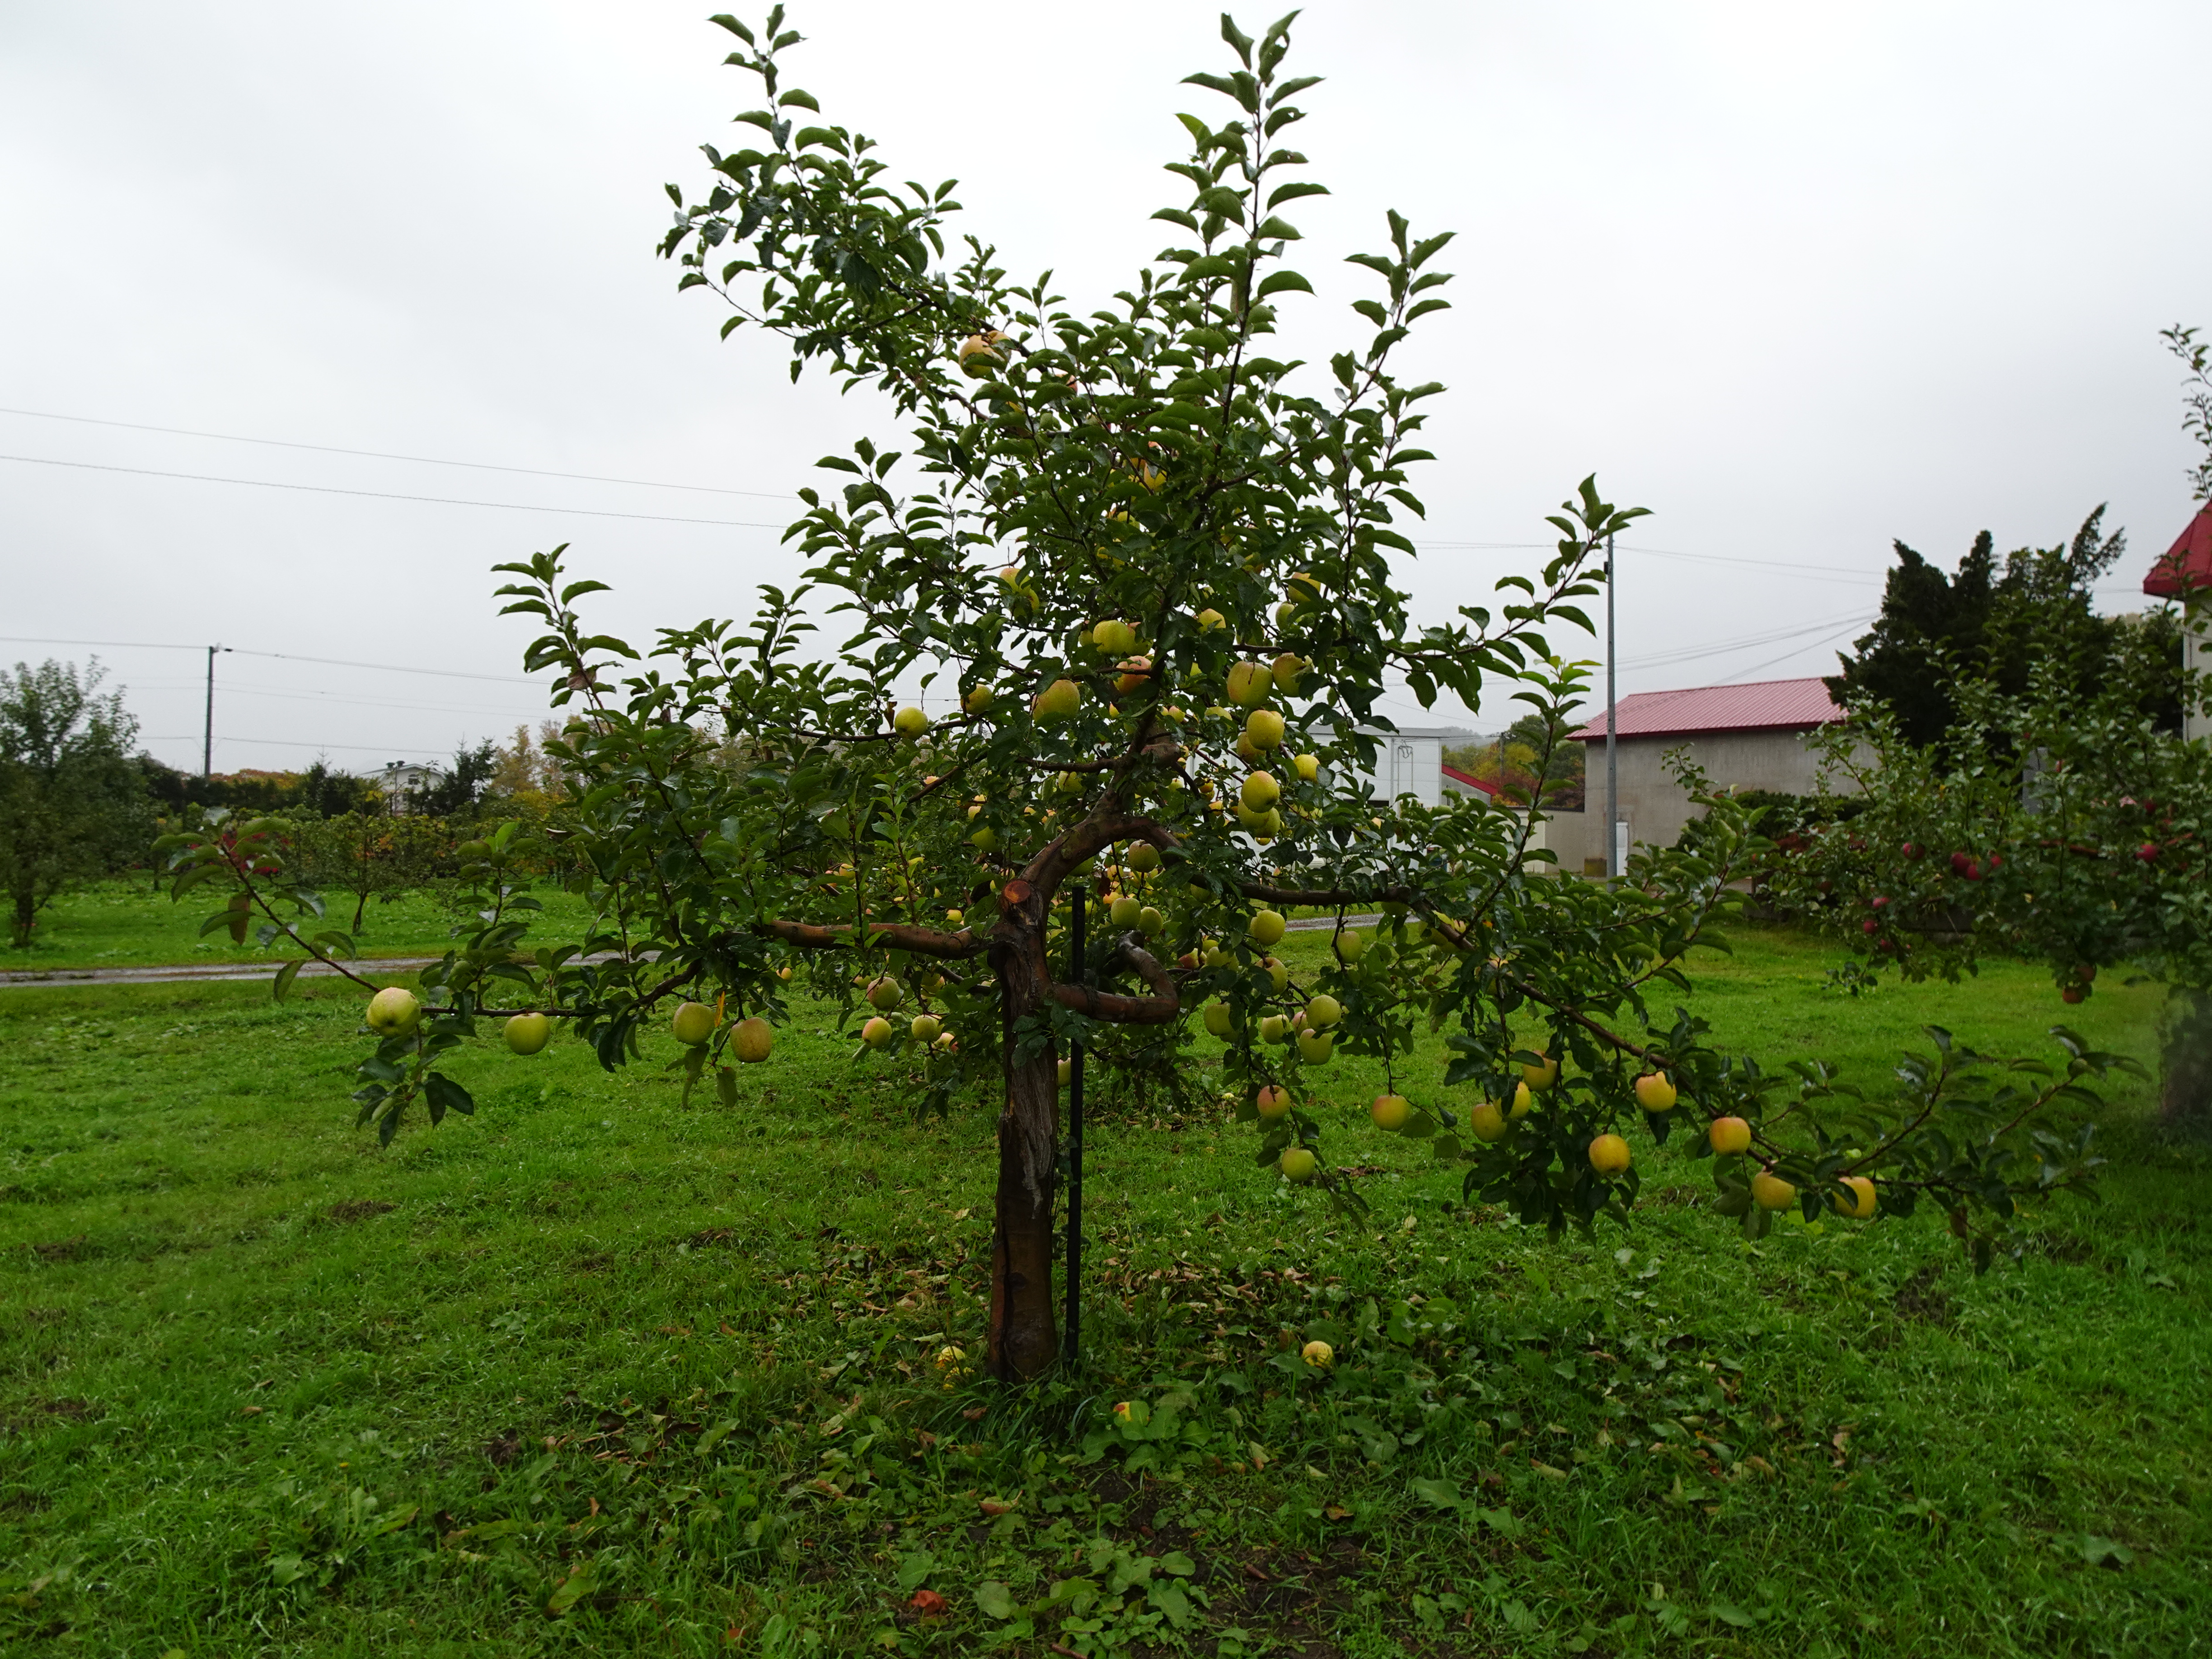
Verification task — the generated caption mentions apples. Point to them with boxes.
[1169,704,1186,724]
[985,330,1011,341]
[1252,957,1288,996]
[1180,662,1204,696]
[1144,462,1167,490]
[1038,679,1080,719]
[1372,1095,1410,1132]
[1107,864,1124,881]
[895,706,928,741]
[990,879,1003,894]
[961,684,993,715]
[1276,602,1304,631]
[1261,1013,1290,1045]
[1205,946,1239,971]
[1193,608,1226,634]
[1169,778,1183,790]
[1419,910,1455,946]
[1041,809,1056,823]
[819,881,836,894]
[824,870,840,876]
[968,806,981,819]
[971,814,1003,852]
[1832,1176,1876,1220]
[839,863,856,879]
[1761,1159,1779,1172]
[1202,939,1220,953]
[1436,919,1466,954]
[1092,620,1129,654]
[1203,706,1232,734]
[1190,884,1216,904]
[862,1017,892,1049]
[1107,506,1140,530]
[730,1017,772,1063]
[1147,868,1162,888]
[1176,948,1207,969]
[1237,798,1269,829]
[998,867,1016,882]
[931,1032,959,1054]
[1111,898,1141,930]
[1027,589,1040,611]
[1258,1084,1292,1121]
[1281,1147,1315,1181]
[1272,652,1314,698]
[1204,1002,1234,1036]
[1103,892,1120,906]
[1208,800,1223,816]
[973,795,987,801]
[1247,710,1284,750]
[1252,807,1280,837]
[1199,777,1214,793]
[1113,656,1152,697]
[1471,1103,1507,1143]
[673,1002,715,1046]
[1201,789,1215,799]
[1128,840,1157,872]
[946,909,962,923]
[1177,757,1186,769]
[1289,803,1323,820]
[1236,732,1266,762]
[505,1012,551,1056]
[867,977,899,1010]
[1330,931,1363,963]
[1078,620,1094,646]
[1136,906,1165,937]
[1288,571,1321,602]
[929,1014,945,1041]
[1250,910,1286,946]
[1293,754,1322,781]
[367,987,421,1040]
[1109,701,1119,719]
[1097,546,1125,572]
[1492,1081,1531,1119]
[1299,1028,1333,1066]
[921,976,945,997]
[1110,881,1122,895]
[1227,661,1273,709]
[1023,804,1037,816]
[1354,817,1381,843]
[1058,770,1087,795]
[1476,957,1514,996]
[776,967,793,980]
[1131,441,1159,470]
[1068,856,1095,877]
[999,568,1031,597]
[1522,1050,1557,1092]
[911,1014,937,1042]
[1256,837,1271,845]
[1056,373,1078,393]
[959,339,995,378]
[1293,1010,1312,1038]
[1635,1071,1677,1113]
[1124,622,1153,656]
[1241,771,1280,813]
[1129,869,1149,889]
[1031,695,1044,723]
[853,975,871,990]
[1751,1171,1796,1211]
[1709,1117,1751,1157]
[1589,1133,1630,1177]
[1229,798,1240,815]
[1305,994,1340,1032]
[1179,745,1189,761]
[969,334,981,340]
